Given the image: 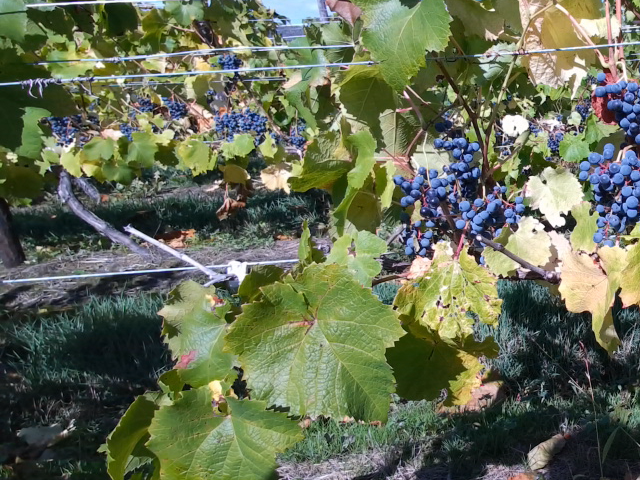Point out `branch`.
<instances>
[{
	"label": "branch",
	"instance_id": "obj_1",
	"mask_svg": "<svg viewBox=\"0 0 640 480\" xmlns=\"http://www.w3.org/2000/svg\"><path fill=\"white\" fill-rule=\"evenodd\" d=\"M519 59V55L515 54L513 56L512 62L510 64V67L508 68L501 84H500V88L498 91V95H497V99H496V103L494 105V111L492 113L491 119L489 120L488 124H487V128H486V140L483 137L482 131L479 127V123H478V119L475 116L474 112L469 108L464 94L462 92H460V88L458 86V84L456 83V81L453 79L452 74L449 72L448 68L442 63L441 60L436 59L435 63L438 65V67L444 72V74L446 75L448 81L450 82V84L452 85L453 89L455 90L456 93H458L459 98L455 99L452 103H450L447 107H445L444 109H442L441 111H439L437 114H435L428 122L425 126H423L422 128H420L416 134L414 135L412 141L410 142L408 149L405 151L404 153V163L407 167V169L410 172L414 171V167L411 165V162L409 160V156L412 153L416 143L418 142L419 138L421 137V135L426 132L428 129L431 128L432 124L435 123V121H437L439 118H441L444 114H447L450 110H452L453 108H455L458 104H462L465 112L468 114V118L471 122H473L474 125V130L477 133V137L478 140L481 144V149H482V162H483V171L484 174L481 176V180H480V185L477 191V197L481 198L482 197V184H485L486 186V192L488 191H492L493 190V186L495 185L494 180L490 177L489 175V168H488V160H487V146L491 143V130L493 127V124L495 123L498 113H499V108L502 102V97L504 94V90L505 87L508 83V80L513 72V70L515 69L516 65H517V61Z\"/></svg>",
	"mask_w": 640,
	"mask_h": 480
},
{
	"label": "branch",
	"instance_id": "obj_2",
	"mask_svg": "<svg viewBox=\"0 0 640 480\" xmlns=\"http://www.w3.org/2000/svg\"><path fill=\"white\" fill-rule=\"evenodd\" d=\"M560 3V0H553L550 4H548L547 6H545L544 8H542L541 10H539L537 13H535L534 15H532L528 21L526 22V24L524 25L521 33L519 34L518 38H517V42H516V48L520 49L521 48V44L522 41L526 35V33L528 32L530 26L532 25V23L539 18L540 16H542L544 13H546L547 11L551 10L555 5H558Z\"/></svg>",
	"mask_w": 640,
	"mask_h": 480
}]
</instances>
